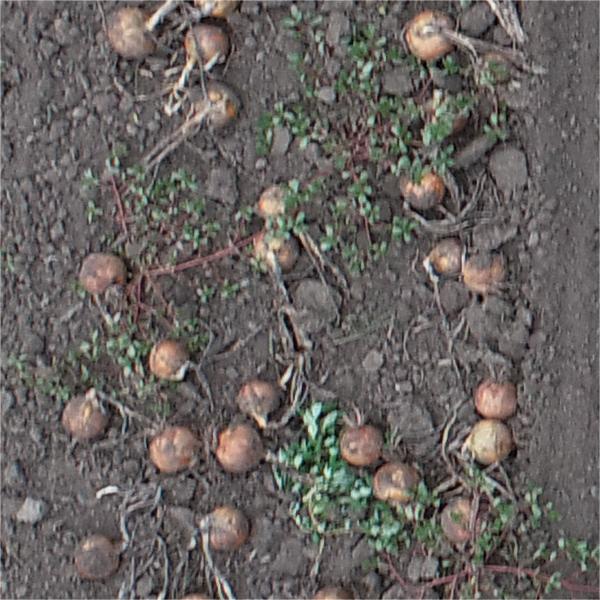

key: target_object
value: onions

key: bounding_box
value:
[193,78,239,128]
[238,376,283,422]
[273,237,301,272]
[254,187,284,217]
[437,503,472,543]
[340,424,382,465]
[403,167,444,208]
[78,251,123,294]
[202,0,240,18]
[476,380,515,416]
[370,461,419,503]
[178,590,212,600]
[146,338,186,378]
[426,239,461,275]
[466,419,512,463]
[480,57,509,86]
[212,421,264,472]
[108,7,154,59]
[462,252,502,292]
[403,9,451,59]
[147,426,197,473]
[73,533,117,579]
[184,24,230,66]
[204,503,249,549]
[60,391,106,439]
[311,584,348,600]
